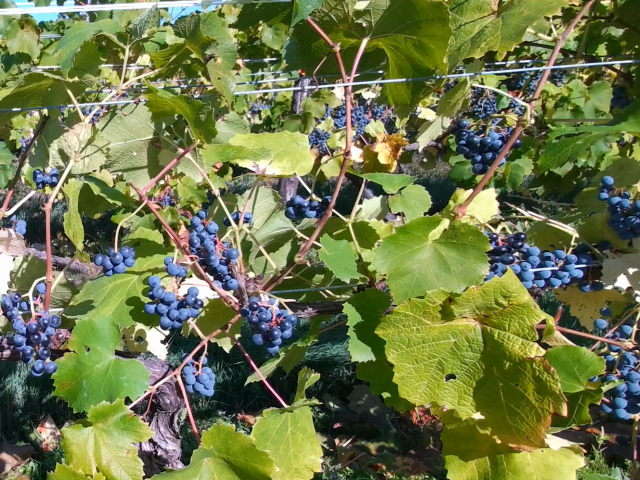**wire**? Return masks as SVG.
Here are the masks:
<instances>
[{
  "mask_svg": "<svg viewBox=\"0 0 640 480\" xmlns=\"http://www.w3.org/2000/svg\"><path fill=\"white\" fill-rule=\"evenodd\" d=\"M146 104L145 100H135V99H127V100H102V101H93V102H79V107H96V106H104V105H126V106H144Z\"/></svg>",
  "mask_w": 640,
  "mask_h": 480,
  "instance_id": "obj_4",
  "label": "wire"
},
{
  "mask_svg": "<svg viewBox=\"0 0 640 480\" xmlns=\"http://www.w3.org/2000/svg\"><path fill=\"white\" fill-rule=\"evenodd\" d=\"M361 282H352L343 285H332L329 287H314V288H305V289H285V290H272V295H288V294H307V293H316V292H331L334 290H345L351 289L354 287H361Z\"/></svg>",
  "mask_w": 640,
  "mask_h": 480,
  "instance_id": "obj_2",
  "label": "wire"
},
{
  "mask_svg": "<svg viewBox=\"0 0 640 480\" xmlns=\"http://www.w3.org/2000/svg\"><path fill=\"white\" fill-rule=\"evenodd\" d=\"M73 104L67 105H28V106H20V107H8V108H0V113H11V112H23L30 110H70L73 109Z\"/></svg>",
  "mask_w": 640,
  "mask_h": 480,
  "instance_id": "obj_3",
  "label": "wire"
},
{
  "mask_svg": "<svg viewBox=\"0 0 640 480\" xmlns=\"http://www.w3.org/2000/svg\"><path fill=\"white\" fill-rule=\"evenodd\" d=\"M635 64H636L635 60L583 61L578 63H564L558 66H532L531 68L521 67L520 69L489 70L484 72L446 73L441 75H433V76H425V77L363 80V81H356V82L344 81V82L335 83V84L309 85V86H301V87L250 89V90H244V91H236L235 95L247 96L252 94L303 92V91H311V90L337 89V88H343L346 86L359 87V86H365V85L427 82V81L443 80V79H449V78L486 77L491 75H498L500 73H510V72H517V71H560L566 68H580L585 66H623V65H635Z\"/></svg>",
  "mask_w": 640,
  "mask_h": 480,
  "instance_id": "obj_1",
  "label": "wire"
}]
</instances>
